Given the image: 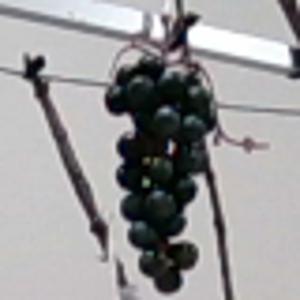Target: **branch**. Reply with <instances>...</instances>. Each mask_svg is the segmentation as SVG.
<instances>
[{"label":"branch","instance_id":"2","mask_svg":"<svg viewBox=\"0 0 300 300\" xmlns=\"http://www.w3.org/2000/svg\"><path fill=\"white\" fill-rule=\"evenodd\" d=\"M201 175H203L209 193L212 225L217 241L220 285L224 292V300H237L234 292L232 266L227 243L226 216L223 214L222 200L219 195L217 173L212 167L211 161L207 171Z\"/></svg>","mask_w":300,"mask_h":300},{"label":"branch","instance_id":"4","mask_svg":"<svg viewBox=\"0 0 300 300\" xmlns=\"http://www.w3.org/2000/svg\"><path fill=\"white\" fill-rule=\"evenodd\" d=\"M285 15L287 23L291 29L300 49V5L294 0H274Z\"/></svg>","mask_w":300,"mask_h":300},{"label":"branch","instance_id":"3","mask_svg":"<svg viewBox=\"0 0 300 300\" xmlns=\"http://www.w3.org/2000/svg\"><path fill=\"white\" fill-rule=\"evenodd\" d=\"M176 19L173 22L172 31L169 34L167 55L175 54L182 48V57L187 69H192L190 60V47L188 44V34L190 28L196 26L201 20L198 12L184 13L183 0H175Z\"/></svg>","mask_w":300,"mask_h":300},{"label":"branch","instance_id":"1","mask_svg":"<svg viewBox=\"0 0 300 300\" xmlns=\"http://www.w3.org/2000/svg\"><path fill=\"white\" fill-rule=\"evenodd\" d=\"M21 59L23 72L20 76L33 90V99L38 102L44 120L48 123L51 139L60 156L62 167L65 169L75 198L87 219L89 226L87 232L96 240L100 250L97 257L105 265L117 292L118 300H144V298L136 296L138 287L130 285V282H128L125 262H122L120 257L111 254L108 222L103 213L99 211L90 181L83 173V168L79 164L69 140V133L64 127L58 110L51 99L49 82L41 76V72L47 66L46 56L37 54L31 57L30 51H22Z\"/></svg>","mask_w":300,"mask_h":300}]
</instances>
